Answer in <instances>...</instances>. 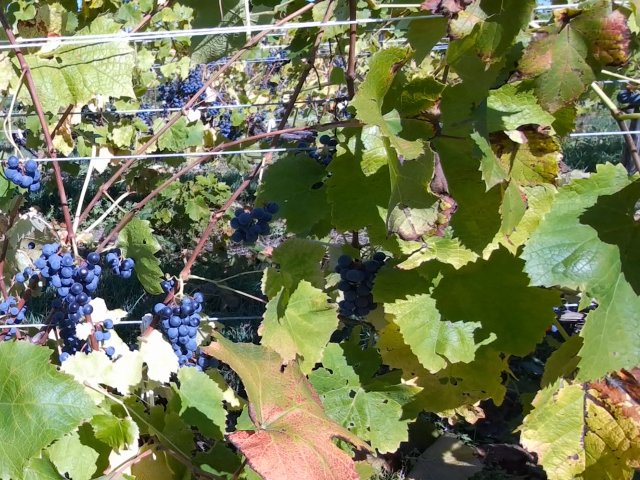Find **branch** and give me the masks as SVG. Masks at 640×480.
Instances as JSON below:
<instances>
[{
    "instance_id": "branch-1",
    "label": "branch",
    "mask_w": 640,
    "mask_h": 480,
    "mask_svg": "<svg viewBox=\"0 0 640 480\" xmlns=\"http://www.w3.org/2000/svg\"><path fill=\"white\" fill-rule=\"evenodd\" d=\"M325 32H326V26L325 25L319 26V30L315 38L314 44L312 46V51H311V55L309 57L307 66L305 67L301 75V78L296 87V90L293 93L289 103L287 104V108L281 120L279 121L278 126L275 129L265 130L252 135H246V136L238 137L236 139L223 140L217 143L213 147L214 151H220L221 149L228 146H238L244 143L254 142V141L265 139L268 137H272L269 148L275 149L278 146L279 139L282 136V134L296 133V132H303V131H314V130L326 129L330 127L348 126L350 124V121L348 119H338V120H328V121L312 123V124L286 126L288 120L290 119V116L292 115L294 106L296 105L299 97L301 96L303 89L307 84L308 77L312 69L314 68L316 59L318 58L319 48L325 36Z\"/></svg>"
},
{
    "instance_id": "branch-2",
    "label": "branch",
    "mask_w": 640,
    "mask_h": 480,
    "mask_svg": "<svg viewBox=\"0 0 640 480\" xmlns=\"http://www.w3.org/2000/svg\"><path fill=\"white\" fill-rule=\"evenodd\" d=\"M270 35L268 30L261 31L251 37L247 43L243 45L214 75L206 81V83L200 88V90L183 106V108L175 116L170 118L164 123L155 134L147 139L137 150L136 154H143L153 143H155L169 128L175 123L179 122L193 107V105L199 101L204 94L212 87V85L225 74L242 56H244L248 50L256 44L259 40L266 38Z\"/></svg>"
},
{
    "instance_id": "branch-3",
    "label": "branch",
    "mask_w": 640,
    "mask_h": 480,
    "mask_svg": "<svg viewBox=\"0 0 640 480\" xmlns=\"http://www.w3.org/2000/svg\"><path fill=\"white\" fill-rule=\"evenodd\" d=\"M272 159H273L272 154H265L261 158V160L256 164V166L253 168V170L247 175L244 181L232 192V194L226 199V201L213 214L207 227L205 228L203 234L201 235L200 241L198 242L197 246L190 252L182 272H179L177 274V279L179 281H183L188 276L196 256L203 250L204 246L207 244V239L211 235L219 218L231 206V204L236 200L239 194L250 185V183L258 175V173L262 170V168L265 165L271 166L273 164Z\"/></svg>"
},
{
    "instance_id": "branch-4",
    "label": "branch",
    "mask_w": 640,
    "mask_h": 480,
    "mask_svg": "<svg viewBox=\"0 0 640 480\" xmlns=\"http://www.w3.org/2000/svg\"><path fill=\"white\" fill-rule=\"evenodd\" d=\"M207 161V157H200L194 161H192L186 168L181 169L174 175L166 178L161 184L156 186L148 195L140 198L131 208V210L120 220V222L100 241L98 247L95 249V253L100 255L105 249L108 242L114 238L118 232H120L124 226L131 220V218L138 212L141 206L149 203L153 200L160 192H162L168 185L176 182L180 178L188 175L191 171H193L196 167L203 165Z\"/></svg>"
},
{
    "instance_id": "branch-5",
    "label": "branch",
    "mask_w": 640,
    "mask_h": 480,
    "mask_svg": "<svg viewBox=\"0 0 640 480\" xmlns=\"http://www.w3.org/2000/svg\"><path fill=\"white\" fill-rule=\"evenodd\" d=\"M16 57H17V60L19 62V65L21 67L23 78L25 80V84L27 86V89L29 91V95H30L31 100H32V104H33V109H34L35 115L38 118V122L40 124V129L42 131V137H43L44 143L46 145V149L49 151L50 157H57V151L54 148L53 142H52V140L50 138L49 129L47 127V122H46L45 116H44V114H43V112L41 110V107H40L39 97H38V94L36 92L34 83L32 81L27 62H26V60L24 58L23 50L21 48H18L16 50Z\"/></svg>"
},
{
    "instance_id": "branch-6",
    "label": "branch",
    "mask_w": 640,
    "mask_h": 480,
    "mask_svg": "<svg viewBox=\"0 0 640 480\" xmlns=\"http://www.w3.org/2000/svg\"><path fill=\"white\" fill-rule=\"evenodd\" d=\"M52 173H53L54 181L57 186L58 197L63 207L64 220L67 228L65 244L67 246H70L73 242V238L75 237V232H74V225L71 218L70 205L66 197L64 184L60 175L59 162H52Z\"/></svg>"
},
{
    "instance_id": "branch-7",
    "label": "branch",
    "mask_w": 640,
    "mask_h": 480,
    "mask_svg": "<svg viewBox=\"0 0 640 480\" xmlns=\"http://www.w3.org/2000/svg\"><path fill=\"white\" fill-rule=\"evenodd\" d=\"M135 163L134 159H130L127 160L126 163L116 172H114L112 174V176H110L108 178V180L101 186V188L98 190V192L96 193L95 196H93L90 201L87 203L86 207L83 209V211L80 213L77 222L79 224H82L85 219L87 218V216L89 215V213L91 212V210L93 209V207L96 205V203L98 201H100L104 194L108 191V189L113 185V183L119 178L121 177L126 171H128L131 166Z\"/></svg>"
},
{
    "instance_id": "branch-8",
    "label": "branch",
    "mask_w": 640,
    "mask_h": 480,
    "mask_svg": "<svg viewBox=\"0 0 640 480\" xmlns=\"http://www.w3.org/2000/svg\"><path fill=\"white\" fill-rule=\"evenodd\" d=\"M356 30L357 26L352 24L349 27V44H350V55H349V65H348V73H347V96L349 98H353L355 96V76L357 71V42H356Z\"/></svg>"
},
{
    "instance_id": "branch-9",
    "label": "branch",
    "mask_w": 640,
    "mask_h": 480,
    "mask_svg": "<svg viewBox=\"0 0 640 480\" xmlns=\"http://www.w3.org/2000/svg\"><path fill=\"white\" fill-rule=\"evenodd\" d=\"M319 3H320V0H310L305 5H303L302 7H299L297 9H295L294 11L290 12L289 14L283 16L281 19H278L276 21V24H285V23L293 20L294 18L304 14L310 8L315 7Z\"/></svg>"
},
{
    "instance_id": "branch-10",
    "label": "branch",
    "mask_w": 640,
    "mask_h": 480,
    "mask_svg": "<svg viewBox=\"0 0 640 480\" xmlns=\"http://www.w3.org/2000/svg\"><path fill=\"white\" fill-rule=\"evenodd\" d=\"M0 25L4 34L9 39V43H17V40L15 39V36L10 30V27L8 26V23L6 21V15L3 12H0Z\"/></svg>"
},
{
    "instance_id": "branch-11",
    "label": "branch",
    "mask_w": 640,
    "mask_h": 480,
    "mask_svg": "<svg viewBox=\"0 0 640 480\" xmlns=\"http://www.w3.org/2000/svg\"><path fill=\"white\" fill-rule=\"evenodd\" d=\"M158 323H159V318L157 316H154L150 321V323L146 326L145 330L142 333V336L144 338H147Z\"/></svg>"
},
{
    "instance_id": "branch-12",
    "label": "branch",
    "mask_w": 640,
    "mask_h": 480,
    "mask_svg": "<svg viewBox=\"0 0 640 480\" xmlns=\"http://www.w3.org/2000/svg\"><path fill=\"white\" fill-rule=\"evenodd\" d=\"M179 290H180V286L178 284H175L173 286L172 290L168 293V295L164 299V303L166 305H169L172 302V300L174 299V297L177 295Z\"/></svg>"
},
{
    "instance_id": "branch-13",
    "label": "branch",
    "mask_w": 640,
    "mask_h": 480,
    "mask_svg": "<svg viewBox=\"0 0 640 480\" xmlns=\"http://www.w3.org/2000/svg\"><path fill=\"white\" fill-rule=\"evenodd\" d=\"M335 7V3L333 1H330L326 7V12L324 14V16L322 17V20H330L333 14V9Z\"/></svg>"
},
{
    "instance_id": "branch-14",
    "label": "branch",
    "mask_w": 640,
    "mask_h": 480,
    "mask_svg": "<svg viewBox=\"0 0 640 480\" xmlns=\"http://www.w3.org/2000/svg\"><path fill=\"white\" fill-rule=\"evenodd\" d=\"M54 327H50L48 326L46 328V330L41 334L40 338H39V342L41 344H44L46 342V340L48 339V337L50 336V334L53 332Z\"/></svg>"
}]
</instances>
